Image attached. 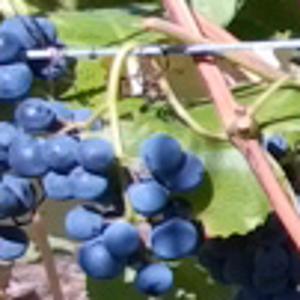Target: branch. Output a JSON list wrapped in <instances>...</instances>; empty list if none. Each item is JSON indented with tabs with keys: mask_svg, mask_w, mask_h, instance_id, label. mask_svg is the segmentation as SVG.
Masks as SVG:
<instances>
[{
	"mask_svg": "<svg viewBox=\"0 0 300 300\" xmlns=\"http://www.w3.org/2000/svg\"><path fill=\"white\" fill-rule=\"evenodd\" d=\"M191 62L199 69L210 103L227 139L246 162L272 206L275 223L289 241L294 252L300 253V221L271 172L262 150V135L252 113L239 105L213 53L196 52Z\"/></svg>",
	"mask_w": 300,
	"mask_h": 300,
	"instance_id": "obj_1",
	"label": "branch"
},
{
	"mask_svg": "<svg viewBox=\"0 0 300 300\" xmlns=\"http://www.w3.org/2000/svg\"><path fill=\"white\" fill-rule=\"evenodd\" d=\"M161 5L184 44L207 43L187 0H161Z\"/></svg>",
	"mask_w": 300,
	"mask_h": 300,
	"instance_id": "obj_2",
	"label": "branch"
}]
</instances>
